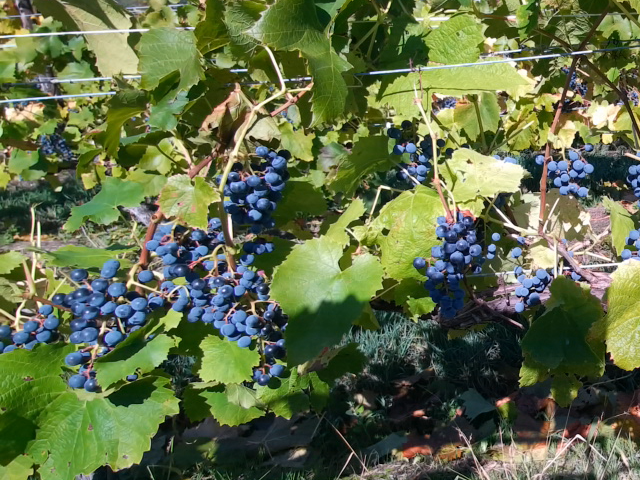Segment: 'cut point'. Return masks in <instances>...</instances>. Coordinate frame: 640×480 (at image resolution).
Returning a JSON list of instances; mask_svg holds the SVG:
<instances>
[{
  "instance_id": "deb38ca7",
  "label": "cut point",
  "mask_w": 640,
  "mask_h": 480,
  "mask_svg": "<svg viewBox=\"0 0 640 480\" xmlns=\"http://www.w3.org/2000/svg\"><path fill=\"white\" fill-rule=\"evenodd\" d=\"M228 243L227 242H220L218 243L210 252L209 257L210 258H214L216 253L218 252V250L222 247H227Z\"/></svg>"
},
{
  "instance_id": "7d7e1d6f",
  "label": "cut point",
  "mask_w": 640,
  "mask_h": 480,
  "mask_svg": "<svg viewBox=\"0 0 640 480\" xmlns=\"http://www.w3.org/2000/svg\"><path fill=\"white\" fill-rule=\"evenodd\" d=\"M142 263H143V260H142V259H138V260H136V261L133 263V265H132V267H131V270L129 271V273H128V275H127V280H128V281H132V280L134 279V276H135V273H136V269H137V267H138L139 265H141Z\"/></svg>"
},
{
  "instance_id": "6a23745f",
  "label": "cut point",
  "mask_w": 640,
  "mask_h": 480,
  "mask_svg": "<svg viewBox=\"0 0 640 480\" xmlns=\"http://www.w3.org/2000/svg\"><path fill=\"white\" fill-rule=\"evenodd\" d=\"M437 183L440 184L444 188V190L446 191L447 195L449 196V198H450V200L452 202V205L456 206L457 205V199L454 196V194H453L451 188L448 186V184L443 179H438Z\"/></svg>"
},
{
  "instance_id": "40658cd0",
  "label": "cut point",
  "mask_w": 640,
  "mask_h": 480,
  "mask_svg": "<svg viewBox=\"0 0 640 480\" xmlns=\"http://www.w3.org/2000/svg\"><path fill=\"white\" fill-rule=\"evenodd\" d=\"M28 301H29V299H25V298H23V299L20 301V304H19V306H18V308H17V311H16V313H15V317H16V318H19V317L21 316L22 311H23V309H24V306H25V304H26Z\"/></svg>"
}]
</instances>
